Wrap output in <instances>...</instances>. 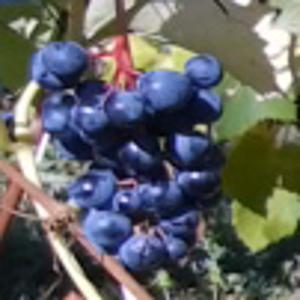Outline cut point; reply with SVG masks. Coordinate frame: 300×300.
<instances>
[{
	"instance_id": "obj_1",
	"label": "cut point",
	"mask_w": 300,
	"mask_h": 300,
	"mask_svg": "<svg viewBox=\"0 0 300 300\" xmlns=\"http://www.w3.org/2000/svg\"><path fill=\"white\" fill-rule=\"evenodd\" d=\"M115 2L117 6L116 64L118 68L131 67L133 57L125 18V0H115Z\"/></svg>"
}]
</instances>
